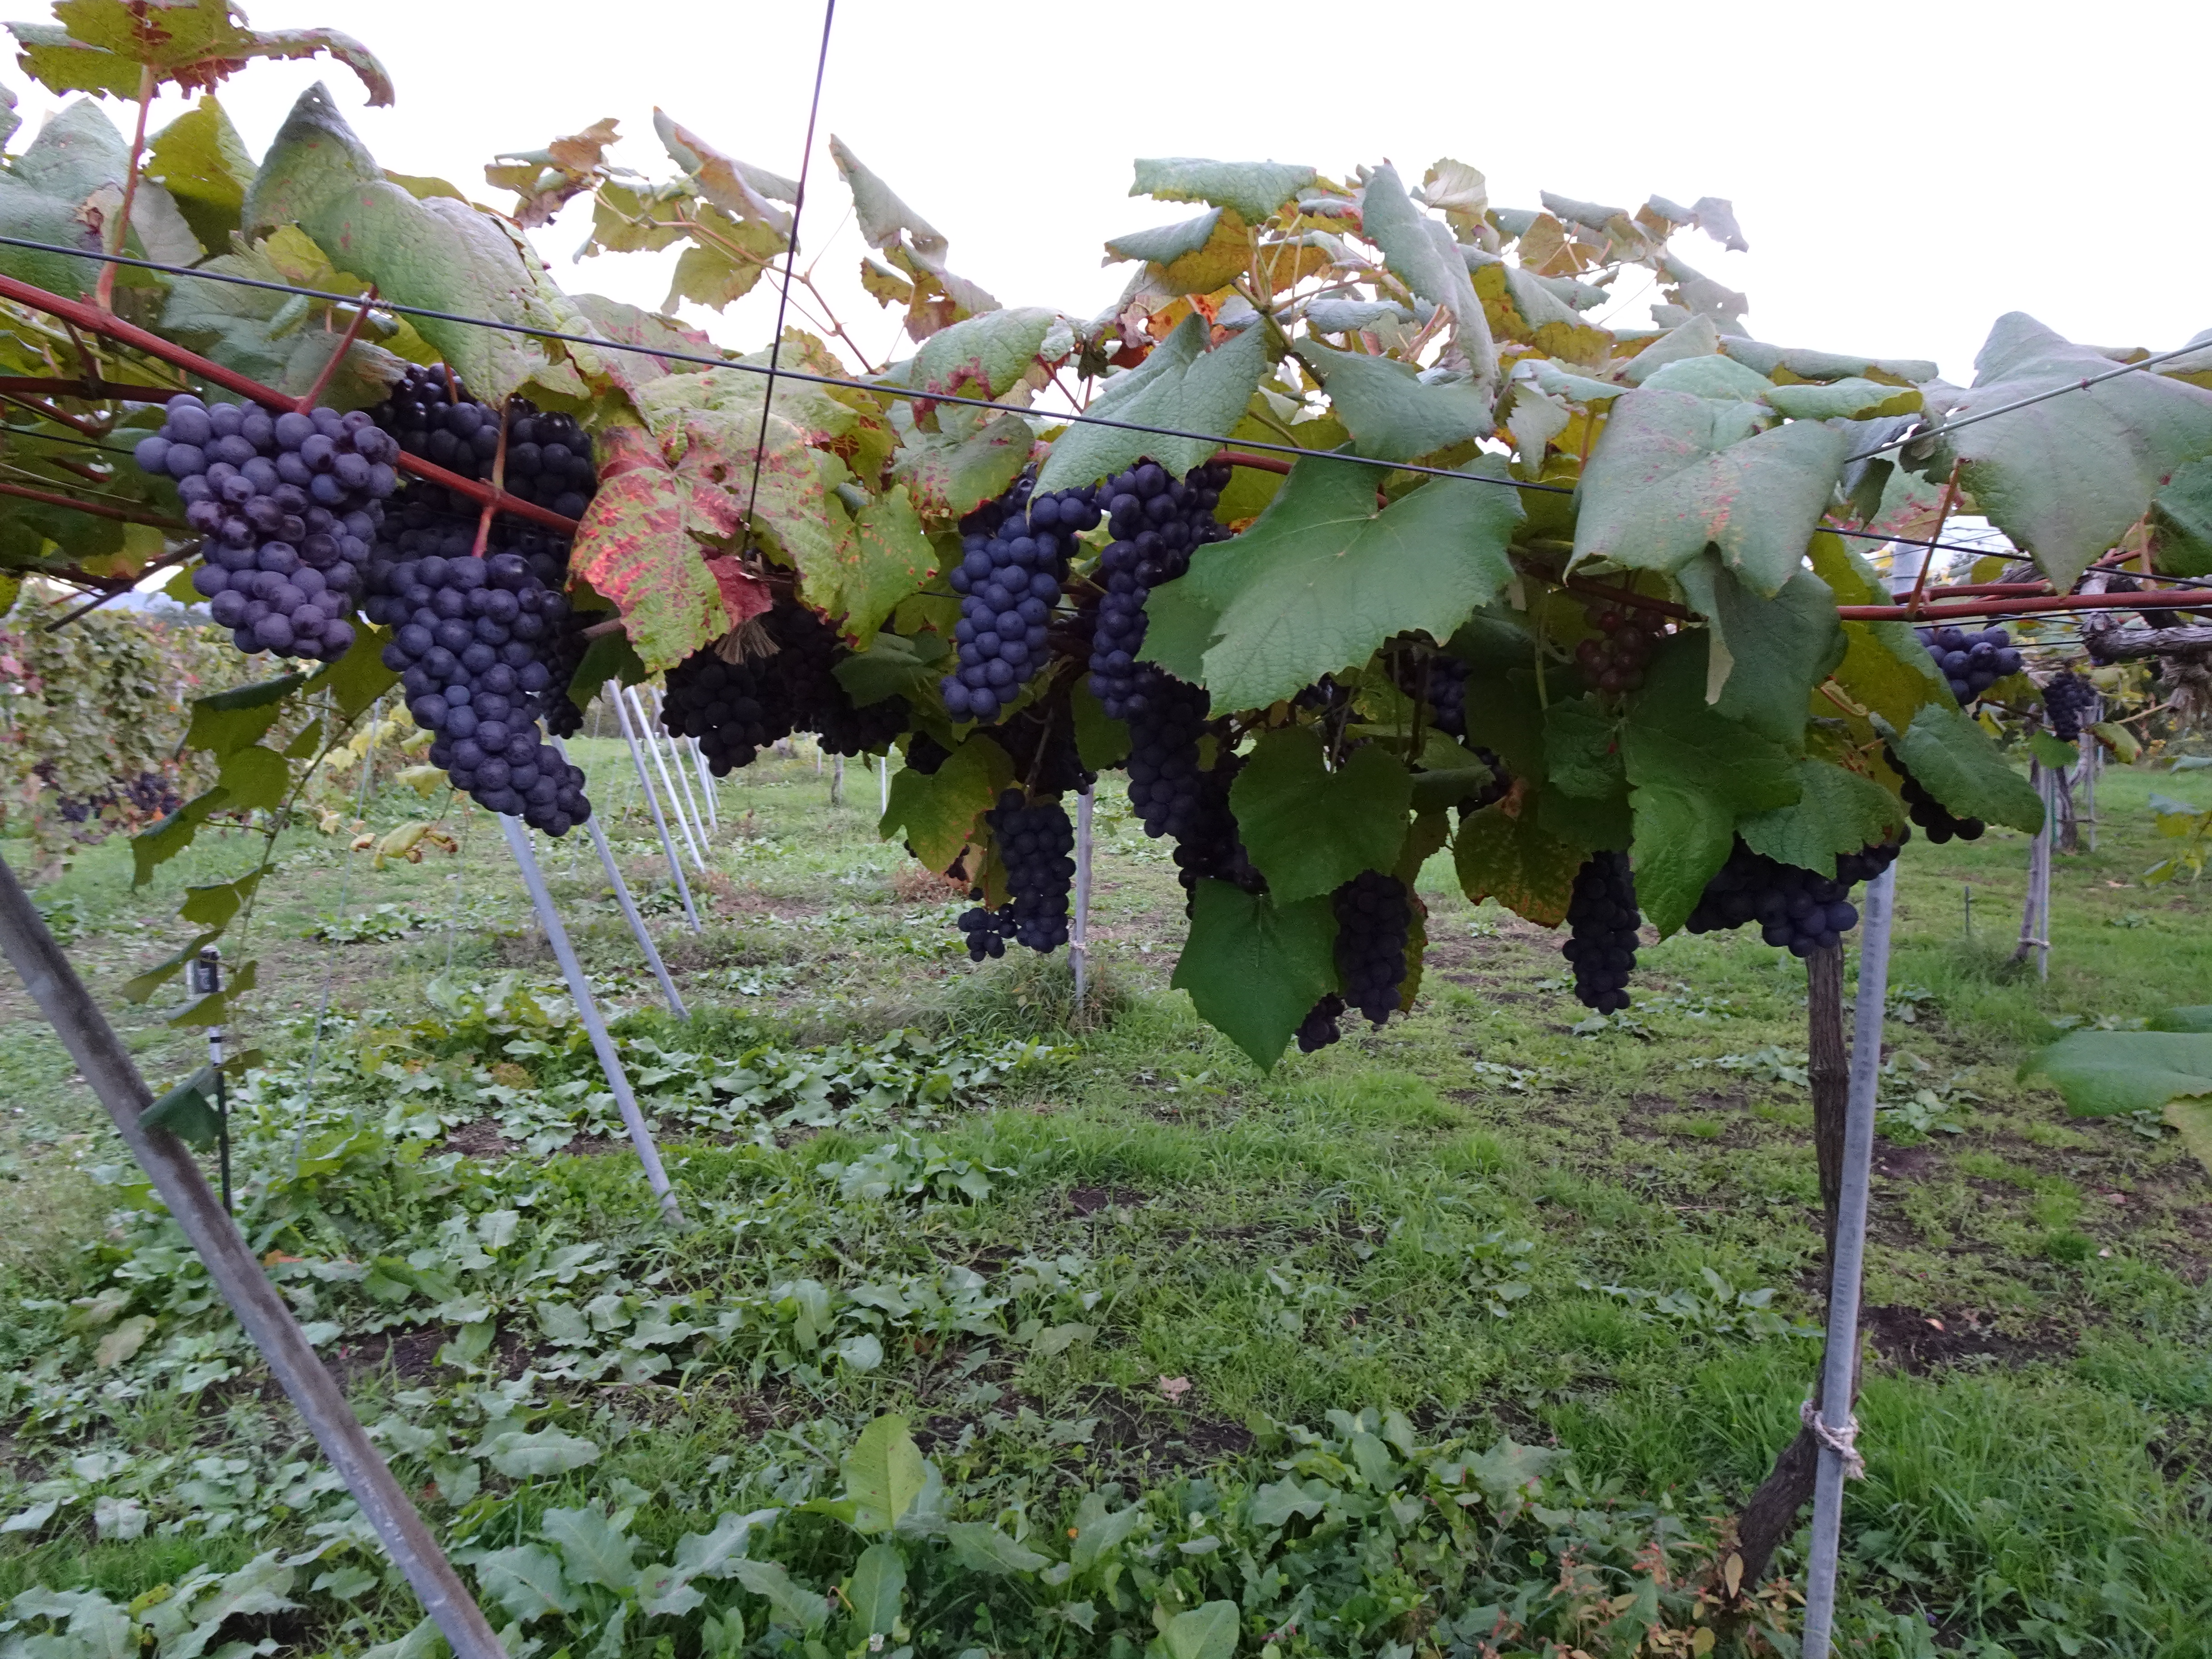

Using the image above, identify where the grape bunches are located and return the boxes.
[1302,685,1363,767]
[366,551,592,838]
[660,629,770,783]
[978,715,1103,803]
[1333,868,1415,1030]
[1098,460,1189,724]
[988,785,1076,955]
[380,357,506,475]
[1202,750,1268,896]
[1570,593,1676,700]
[1126,723,1204,844]
[386,484,492,562]
[776,589,912,759]
[1389,648,1476,741]
[135,390,398,663]
[1561,847,1643,1016]
[1174,463,1233,547]
[58,786,91,827]
[1883,741,1994,844]
[503,401,618,516]
[129,769,185,821]
[1909,623,2026,707]
[1830,816,1910,887]
[1459,748,1522,814]
[1752,860,1859,963]
[1682,840,1758,937]
[1297,991,1348,1056]
[493,509,587,557]
[2040,663,2100,751]
[940,485,1099,726]
[953,886,1011,964]
[1170,843,1205,927]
